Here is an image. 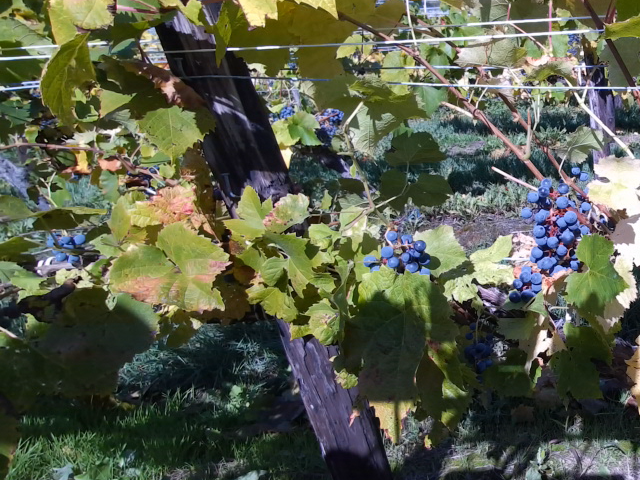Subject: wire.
<instances>
[{
	"label": "wire",
	"instance_id": "obj_1",
	"mask_svg": "<svg viewBox=\"0 0 640 480\" xmlns=\"http://www.w3.org/2000/svg\"><path fill=\"white\" fill-rule=\"evenodd\" d=\"M603 31L595 29H571V30H549L533 33H511L495 35H456L440 39H393L380 43H302L297 45H243L239 47H228V52H241L245 50H299L304 48H382L396 44H443L458 40H497L512 38H535L552 35H573V34H598Z\"/></svg>",
	"mask_w": 640,
	"mask_h": 480
},
{
	"label": "wire",
	"instance_id": "obj_2",
	"mask_svg": "<svg viewBox=\"0 0 640 480\" xmlns=\"http://www.w3.org/2000/svg\"><path fill=\"white\" fill-rule=\"evenodd\" d=\"M387 85H405L411 87H467L484 90L544 89L550 91H640V86H552L546 84L486 85L469 82H413L407 80H392L388 81Z\"/></svg>",
	"mask_w": 640,
	"mask_h": 480
},
{
	"label": "wire",
	"instance_id": "obj_3",
	"mask_svg": "<svg viewBox=\"0 0 640 480\" xmlns=\"http://www.w3.org/2000/svg\"><path fill=\"white\" fill-rule=\"evenodd\" d=\"M584 19H591L590 15L581 14L579 16H561L556 18L496 19V20H474V21L451 22V23L402 24V25H393V26H380L379 30L395 31V30H404V29L472 27L476 25L559 23L563 21H581Z\"/></svg>",
	"mask_w": 640,
	"mask_h": 480
},
{
	"label": "wire",
	"instance_id": "obj_4",
	"mask_svg": "<svg viewBox=\"0 0 640 480\" xmlns=\"http://www.w3.org/2000/svg\"><path fill=\"white\" fill-rule=\"evenodd\" d=\"M203 79H260L266 81L275 82H306V81H320L329 82V77L322 76H304V77H277L268 76L262 74H201V75H186L179 76V81L188 80H203Z\"/></svg>",
	"mask_w": 640,
	"mask_h": 480
},
{
	"label": "wire",
	"instance_id": "obj_5",
	"mask_svg": "<svg viewBox=\"0 0 640 480\" xmlns=\"http://www.w3.org/2000/svg\"><path fill=\"white\" fill-rule=\"evenodd\" d=\"M37 80H21L14 82H5L4 86L1 87V92H14V91H31V90H39L40 86L37 85Z\"/></svg>",
	"mask_w": 640,
	"mask_h": 480
},
{
	"label": "wire",
	"instance_id": "obj_6",
	"mask_svg": "<svg viewBox=\"0 0 640 480\" xmlns=\"http://www.w3.org/2000/svg\"><path fill=\"white\" fill-rule=\"evenodd\" d=\"M473 64L461 65V64H448V65H434V70H450V69H461L462 71L473 69Z\"/></svg>",
	"mask_w": 640,
	"mask_h": 480
}]
</instances>
